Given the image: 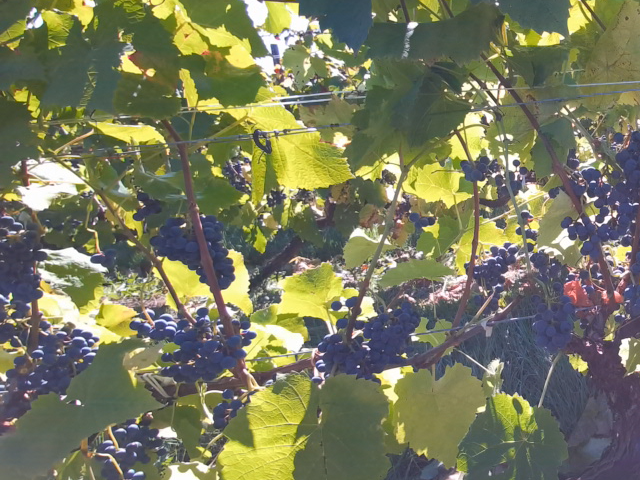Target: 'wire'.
Returning a JSON list of instances; mask_svg holds the SVG:
<instances>
[{
	"label": "wire",
	"mask_w": 640,
	"mask_h": 480,
	"mask_svg": "<svg viewBox=\"0 0 640 480\" xmlns=\"http://www.w3.org/2000/svg\"><path fill=\"white\" fill-rule=\"evenodd\" d=\"M350 121H343L341 123L334 124H307V125H297L290 127H282L275 128L269 130H250L249 133H234L222 136H215L209 138H186V139H175L169 141H159V142H149V143H133V144H122V145H113V146H100L96 147V152L102 151H115V150H124V149H136V148H152V147H162V146H171L177 144H189V143H212L217 141H224L236 138H253L254 135H258V140H268L274 138H281L285 136H296L300 134H310L315 133L316 129H336V128H344L346 126H350Z\"/></svg>",
	"instance_id": "1"
},
{
	"label": "wire",
	"mask_w": 640,
	"mask_h": 480,
	"mask_svg": "<svg viewBox=\"0 0 640 480\" xmlns=\"http://www.w3.org/2000/svg\"><path fill=\"white\" fill-rule=\"evenodd\" d=\"M367 88H357V89H342L335 91H314L306 94L299 95H287L283 97H273V102H284V103H255V104H243L232 107H221L219 103H208V104H193V105H181L180 113L181 114H203V113H215V112H234L245 109H257V108H287L290 106H295L299 104H310V103H323L330 102V97H320L313 98L317 96H338L341 101L345 100H364V95H344V94H359V93H367Z\"/></svg>",
	"instance_id": "2"
},
{
	"label": "wire",
	"mask_w": 640,
	"mask_h": 480,
	"mask_svg": "<svg viewBox=\"0 0 640 480\" xmlns=\"http://www.w3.org/2000/svg\"><path fill=\"white\" fill-rule=\"evenodd\" d=\"M631 93H640V88H629V89H620V90H592L587 92H581L571 96H557V97H551V98H543L540 100L508 101V102L501 103L499 105L472 108L471 112L482 113V112L501 110L503 108L511 107V106L542 105L546 103H553V102H560V101H573L583 97H589L594 95H622V94H631Z\"/></svg>",
	"instance_id": "3"
},
{
	"label": "wire",
	"mask_w": 640,
	"mask_h": 480,
	"mask_svg": "<svg viewBox=\"0 0 640 480\" xmlns=\"http://www.w3.org/2000/svg\"><path fill=\"white\" fill-rule=\"evenodd\" d=\"M114 119L113 113H100L97 115L87 116V117H67L63 119L57 120H45V125H60L69 122H88V123H97V122H105Z\"/></svg>",
	"instance_id": "4"
},
{
	"label": "wire",
	"mask_w": 640,
	"mask_h": 480,
	"mask_svg": "<svg viewBox=\"0 0 640 480\" xmlns=\"http://www.w3.org/2000/svg\"><path fill=\"white\" fill-rule=\"evenodd\" d=\"M543 84H532V85H492L487 86L485 88H472V89H462V94H474V93H488L489 91L494 90H535V89H543Z\"/></svg>",
	"instance_id": "5"
},
{
	"label": "wire",
	"mask_w": 640,
	"mask_h": 480,
	"mask_svg": "<svg viewBox=\"0 0 640 480\" xmlns=\"http://www.w3.org/2000/svg\"><path fill=\"white\" fill-rule=\"evenodd\" d=\"M317 352H318L317 348L310 349L309 347H306V348H302L301 351L299 352H283V353L269 354L267 356H262L259 358H247L246 362L261 363V362L269 361L271 359L285 358V357H301V356H307L310 354H315Z\"/></svg>",
	"instance_id": "6"
},
{
	"label": "wire",
	"mask_w": 640,
	"mask_h": 480,
	"mask_svg": "<svg viewBox=\"0 0 640 480\" xmlns=\"http://www.w3.org/2000/svg\"><path fill=\"white\" fill-rule=\"evenodd\" d=\"M640 83V78L634 79H624V80H601V81H593V82H585V83H569V88H587V87H595V86H603V85H626V84H637Z\"/></svg>",
	"instance_id": "7"
},
{
	"label": "wire",
	"mask_w": 640,
	"mask_h": 480,
	"mask_svg": "<svg viewBox=\"0 0 640 480\" xmlns=\"http://www.w3.org/2000/svg\"><path fill=\"white\" fill-rule=\"evenodd\" d=\"M534 318H535L534 314H526V315H521L517 317L501 318V319L485 321L483 323V326L488 327V326L497 325V324L519 322V321L529 320Z\"/></svg>",
	"instance_id": "8"
},
{
	"label": "wire",
	"mask_w": 640,
	"mask_h": 480,
	"mask_svg": "<svg viewBox=\"0 0 640 480\" xmlns=\"http://www.w3.org/2000/svg\"><path fill=\"white\" fill-rule=\"evenodd\" d=\"M461 329H462L461 325H457V326H454V327L438 328V329H434V330H430V331L413 332L411 334V337L415 338V337L433 336V335H437V334H440V333L457 332V331H459Z\"/></svg>",
	"instance_id": "9"
}]
</instances>
